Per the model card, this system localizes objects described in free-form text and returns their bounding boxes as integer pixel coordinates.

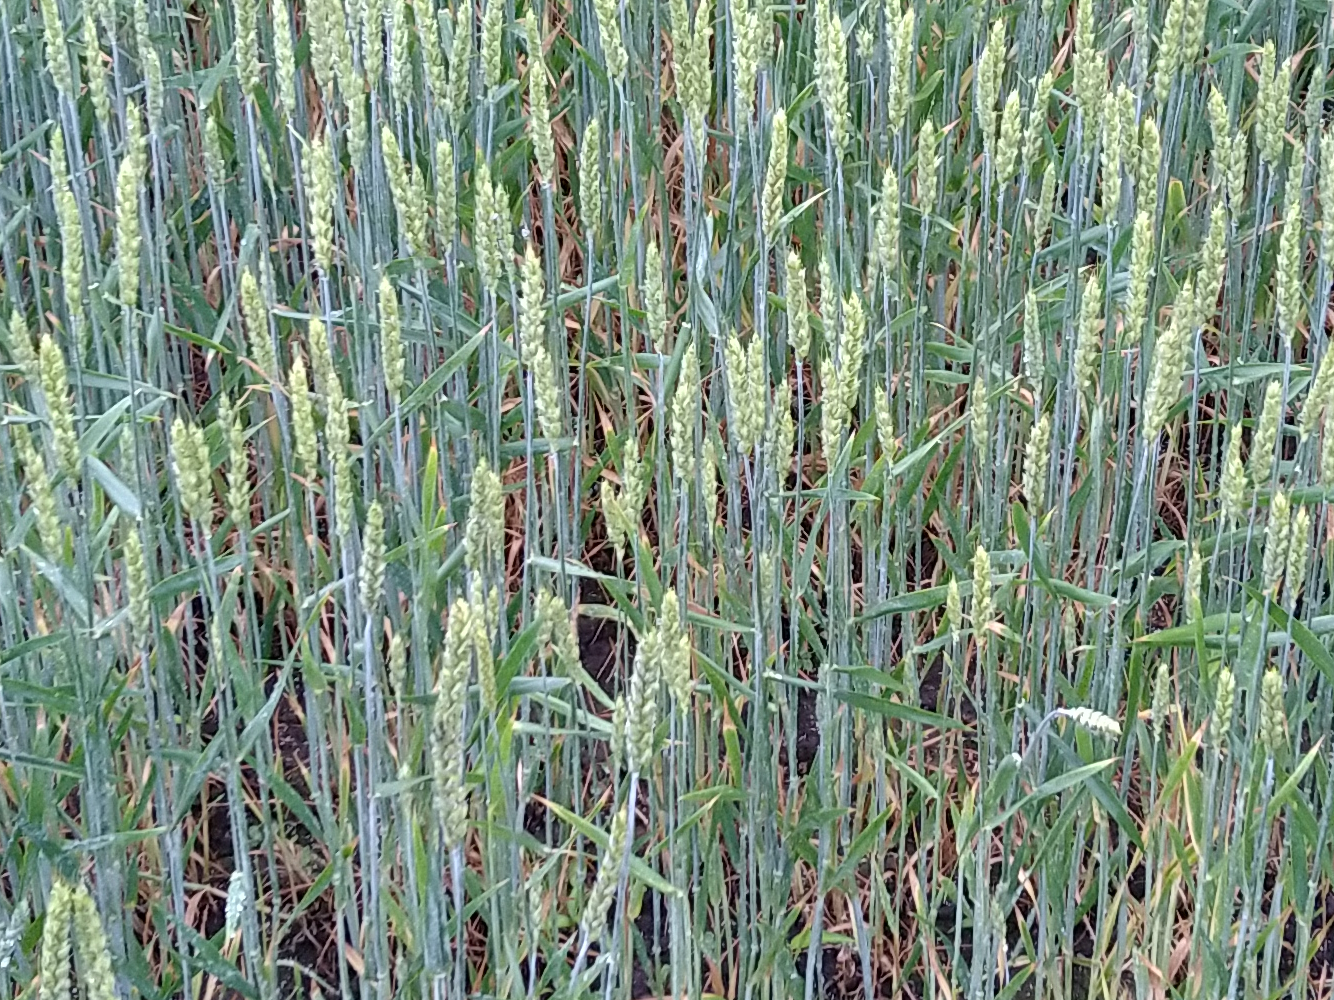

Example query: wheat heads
[1285,143,1307,218]
[546,598,579,658]
[229,0,257,87]
[581,121,602,232]
[591,0,626,78]
[321,0,356,99]
[307,143,334,266]
[118,430,137,506]
[609,699,629,759]
[377,126,417,242]
[489,473,506,566]
[62,185,82,297]
[818,252,834,346]
[0,903,33,966]
[1153,665,1170,735]
[687,0,713,130]
[1275,207,1303,329]
[1228,135,1246,209]
[624,439,640,529]
[39,334,76,457]
[776,409,792,471]
[40,887,71,1000]
[1268,57,1292,158]
[730,0,746,49]
[1091,55,1109,145]
[581,810,622,935]
[1209,78,1228,184]
[74,888,123,1000]
[205,114,227,183]
[125,531,146,645]
[93,0,113,27]
[256,256,278,301]
[1153,0,1192,101]
[557,0,566,49]
[1117,218,1151,344]
[1030,164,1056,248]
[534,590,553,661]
[299,145,314,213]
[379,279,407,389]
[1211,671,1234,735]
[1187,553,1201,614]
[1218,423,1244,520]
[45,127,62,215]
[168,419,197,516]
[643,244,668,358]
[972,548,992,645]
[970,375,986,462]
[1172,283,1195,373]
[186,421,211,516]
[471,583,493,709]
[1072,276,1102,387]
[1102,94,1119,217]
[8,311,38,385]
[882,0,900,48]
[1252,384,1283,488]
[40,0,72,88]
[1027,70,1052,159]
[86,18,112,129]
[139,46,161,127]
[1256,39,1275,147]
[413,164,428,224]
[1133,0,1156,78]
[1115,85,1139,185]
[528,66,554,176]
[324,396,350,534]
[1192,206,1228,319]
[1044,0,1062,19]
[868,0,883,26]
[628,632,661,763]
[839,296,864,416]
[832,15,854,146]
[260,142,270,181]
[219,392,232,445]
[767,385,791,461]
[868,229,879,293]
[475,165,501,291]
[758,0,778,58]
[465,462,487,573]
[344,75,364,157]
[488,578,506,645]
[977,23,1007,148]
[360,0,384,77]
[1260,670,1280,754]
[343,0,364,32]
[992,91,1020,188]
[748,337,765,452]
[135,0,150,49]
[759,552,771,619]
[1136,117,1162,231]
[390,0,412,99]
[917,121,936,208]
[1180,0,1216,63]
[947,577,964,632]
[390,633,403,689]
[763,112,788,235]
[526,8,546,86]
[290,356,315,475]
[1261,494,1291,601]
[111,154,137,299]
[1025,295,1047,392]
[668,0,689,107]
[1140,333,1181,439]
[126,101,139,154]
[888,11,915,129]
[514,245,543,358]
[814,0,836,106]
[1320,354,1334,476]
[1322,136,1334,270]
[11,422,62,563]
[361,505,385,613]
[442,0,472,120]
[735,8,758,123]
[855,27,873,54]
[878,166,899,270]
[787,252,808,354]
[1296,337,1334,429]
[723,336,749,458]
[668,346,695,477]
[305,0,331,93]
[1078,0,1095,102]
[876,385,895,462]
[438,138,454,247]
[243,274,278,372]
[434,602,468,722]
[478,0,507,87]
[702,438,715,527]
[309,321,340,419]
[657,585,687,709]
[274,0,297,105]
[430,714,465,840]
[1058,707,1121,736]
[531,351,561,440]
[821,356,841,467]
[413,0,442,99]
[495,182,512,272]
[600,479,628,550]
[1284,509,1314,605]
[227,415,252,519]
[1023,413,1050,516]
[1306,63,1324,137]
